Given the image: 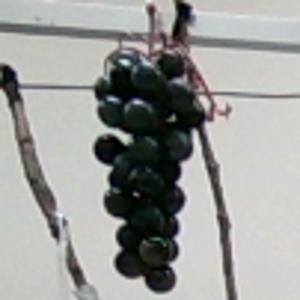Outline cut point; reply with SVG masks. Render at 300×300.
<instances>
[{
	"label": "cut point",
	"mask_w": 300,
	"mask_h": 300,
	"mask_svg": "<svg viewBox=\"0 0 300 300\" xmlns=\"http://www.w3.org/2000/svg\"><path fill=\"white\" fill-rule=\"evenodd\" d=\"M159 5L154 0H144L142 13L147 16L148 62L154 65L155 24Z\"/></svg>",
	"instance_id": "obj_1"
}]
</instances>
